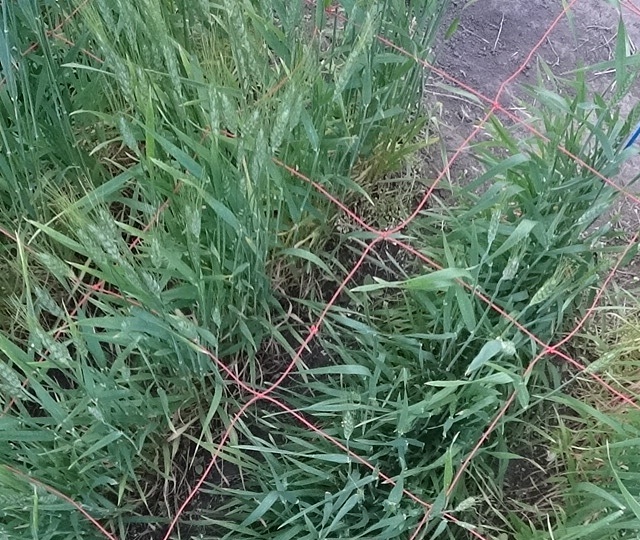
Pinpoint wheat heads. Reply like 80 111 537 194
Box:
576 200 605 230
503 257 523 279
219 90 238 128
39 250 71 276
232 8 261 84
0 358 23 388
95 1 115 27
611 71 634 104
545 138 554 172
208 86 221 137
117 119 136 155
219 171 232 202
108 53 136 108
185 207 200 236
78 229 108 267
459 496 478 512
292 94 304 127
333 50 362 96
253 132 266 171
143 270 159 297
147 234 164 265
135 67 151 97
486 210 501 242
531 281 558 306
274 108 292 146
500 341 517 355
586 351 615 369
174 319 197 340
38 330 67 366
164 47 178 91
91 224 121 258
241 112 255 137
36 285 61 314
98 209 117 235
86 406 106 424
340 411 356 439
